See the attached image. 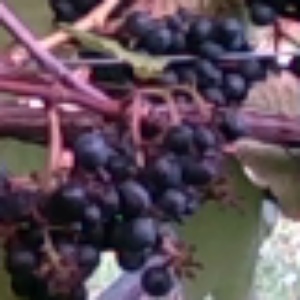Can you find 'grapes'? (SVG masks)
Segmentation results:
<instances>
[{
  "label": "grapes",
  "instance_id": "obj_1",
  "mask_svg": "<svg viewBox=\"0 0 300 300\" xmlns=\"http://www.w3.org/2000/svg\"><path fill=\"white\" fill-rule=\"evenodd\" d=\"M225 145L214 126L188 122L165 125L140 151L110 132L79 133L53 207L90 242L113 248L123 269L138 270L175 237L176 219L202 208L203 187L221 178Z\"/></svg>",
  "mask_w": 300,
  "mask_h": 300
}]
</instances>
